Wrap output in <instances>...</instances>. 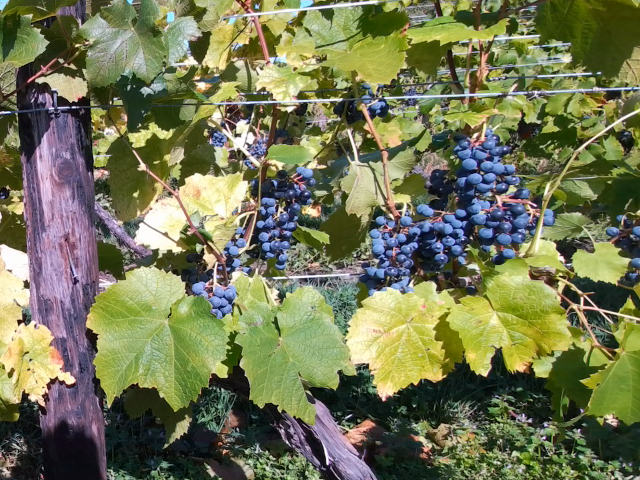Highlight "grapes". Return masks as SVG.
<instances>
[{
    "label": "grapes",
    "instance_id": "4",
    "mask_svg": "<svg viewBox=\"0 0 640 480\" xmlns=\"http://www.w3.org/2000/svg\"><path fill=\"white\" fill-rule=\"evenodd\" d=\"M246 247V240L243 237H239L237 240H231L228 242L227 246L223 249L222 255L226 257V270L227 273H231L235 271L237 268L244 274H250L252 268L250 266H240L241 260L239 258L233 259L232 257H237L240 254V248Z\"/></svg>",
    "mask_w": 640,
    "mask_h": 480
},
{
    "label": "grapes",
    "instance_id": "6",
    "mask_svg": "<svg viewBox=\"0 0 640 480\" xmlns=\"http://www.w3.org/2000/svg\"><path fill=\"white\" fill-rule=\"evenodd\" d=\"M346 122L349 125H353L357 120L364 122L365 119L361 115L360 111L357 110V106L355 102H349L346 110Z\"/></svg>",
    "mask_w": 640,
    "mask_h": 480
},
{
    "label": "grapes",
    "instance_id": "2",
    "mask_svg": "<svg viewBox=\"0 0 640 480\" xmlns=\"http://www.w3.org/2000/svg\"><path fill=\"white\" fill-rule=\"evenodd\" d=\"M295 172L301 176L305 184L298 185L285 180L288 176L286 170L277 172V179H271L261 185L259 201V213L266 219H260L255 223V228L261 230L258 234V241L261 243V250L265 252L267 259L275 257L274 268L284 270L289 261L287 251L291 248L288 241L297 231L300 218L298 213L301 206H308L312 203V192L307 187H314L316 180L313 178L314 172L310 168L297 166ZM286 197L289 203L284 207L285 211L279 213V221L274 219L277 211V200Z\"/></svg>",
    "mask_w": 640,
    "mask_h": 480
},
{
    "label": "grapes",
    "instance_id": "5",
    "mask_svg": "<svg viewBox=\"0 0 640 480\" xmlns=\"http://www.w3.org/2000/svg\"><path fill=\"white\" fill-rule=\"evenodd\" d=\"M360 87L367 91V94H362V101L367 107V113L371 119H374L376 116L380 118H384L389 112V105L386 101H378L372 103V89L369 84L362 82Z\"/></svg>",
    "mask_w": 640,
    "mask_h": 480
},
{
    "label": "grapes",
    "instance_id": "7",
    "mask_svg": "<svg viewBox=\"0 0 640 480\" xmlns=\"http://www.w3.org/2000/svg\"><path fill=\"white\" fill-rule=\"evenodd\" d=\"M622 219L624 222V228L628 230L632 229V234L634 235V237L640 239V226H634V222L631 219H628L627 217L623 218V215L621 214L615 216V221L617 223H621Z\"/></svg>",
    "mask_w": 640,
    "mask_h": 480
},
{
    "label": "grapes",
    "instance_id": "1",
    "mask_svg": "<svg viewBox=\"0 0 640 480\" xmlns=\"http://www.w3.org/2000/svg\"><path fill=\"white\" fill-rule=\"evenodd\" d=\"M482 145L472 146V140L464 134H456L453 142L456 145L453 153L463 160L461 167L456 170V179L446 183L444 175L449 170L435 169L430 172L428 193L436 195L438 199H431L426 204L415 207L417 215L432 217L436 210L444 211L450 203L449 194L454 191L460 198L454 214L444 215L442 220L415 221L410 211H405L399 218L402 228H410L405 233L391 237L389 231L372 228L369 237L372 239L370 250L379 263L372 266L364 263L359 275V282L366 284L367 294L373 296L379 288V283L387 280V275L395 277L396 282L390 284L392 290L400 293L413 294L415 289L408 286L411 276L417 272V259L422 260L420 268L426 273L439 272L442 267L456 258L458 265L465 263L468 256L466 244L475 234L474 225L483 226L478 230L479 249L489 252L491 245H511L523 243L526 230L531 236L536 235L538 217H533L526 211V206L516 201L502 202L500 208L484 212L495 207V200H481L476 197L489 196L495 189L498 194L509 190V185H518L520 178L513 173V164L501 162L504 155L511 152L512 147L501 144L496 130L491 127L485 129Z\"/></svg>",
    "mask_w": 640,
    "mask_h": 480
},
{
    "label": "grapes",
    "instance_id": "8",
    "mask_svg": "<svg viewBox=\"0 0 640 480\" xmlns=\"http://www.w3.org/2000/svg\"><path fill=\"white\" fill-rule=\"evenodd\" d=\"M509 197H516L521 200H528L532 197V191L529 188H520L516 192L512 191L508 193Z\"/></svg>",
    "mask_w": 640,
    "mask_h": 480
},
{
    "label": "grapes",
    "instance_id": "3",
    "mask_svg": "<svg viewBox=\"0 0 640 480\" xmlns=\"http://www.w3.org/2000/svg\"><path fill=\"white\" fill-rule=\"evenodd\" d=\"M184 276H189L187 282L190 284L192 294L195 296H204L205 300L212 306L211 312L215 314L217 319H223L225 315L232 314L233 300L237 297V289L234 285H228L227 288L216 287L214 295L212 288H206V282L213 278V270L208 269L207 272H198V268L191 266L182 270Z\"/></svg>",
    "mask_w": 640,
    "mask_h": 480
}]
</instances>
